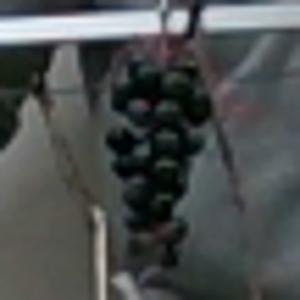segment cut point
<instances>
[{
    "instance_id": "obj_1",
    "label": "cut point",
    "mask_w": 300,
    "mask_h": 300,
    "mask_svg": "<svg viewBox=\"0 0 300 300\" xmlns=\"http://www.w3.org/2000/svg\"><path fill=\"white\" fill-rule=\"evenodd\" d=\"M156 20L160 24V60L161 66H166L167 58V21L171 15L169 0H159L154 9Z\"/></svg>"
}]
</instances>
